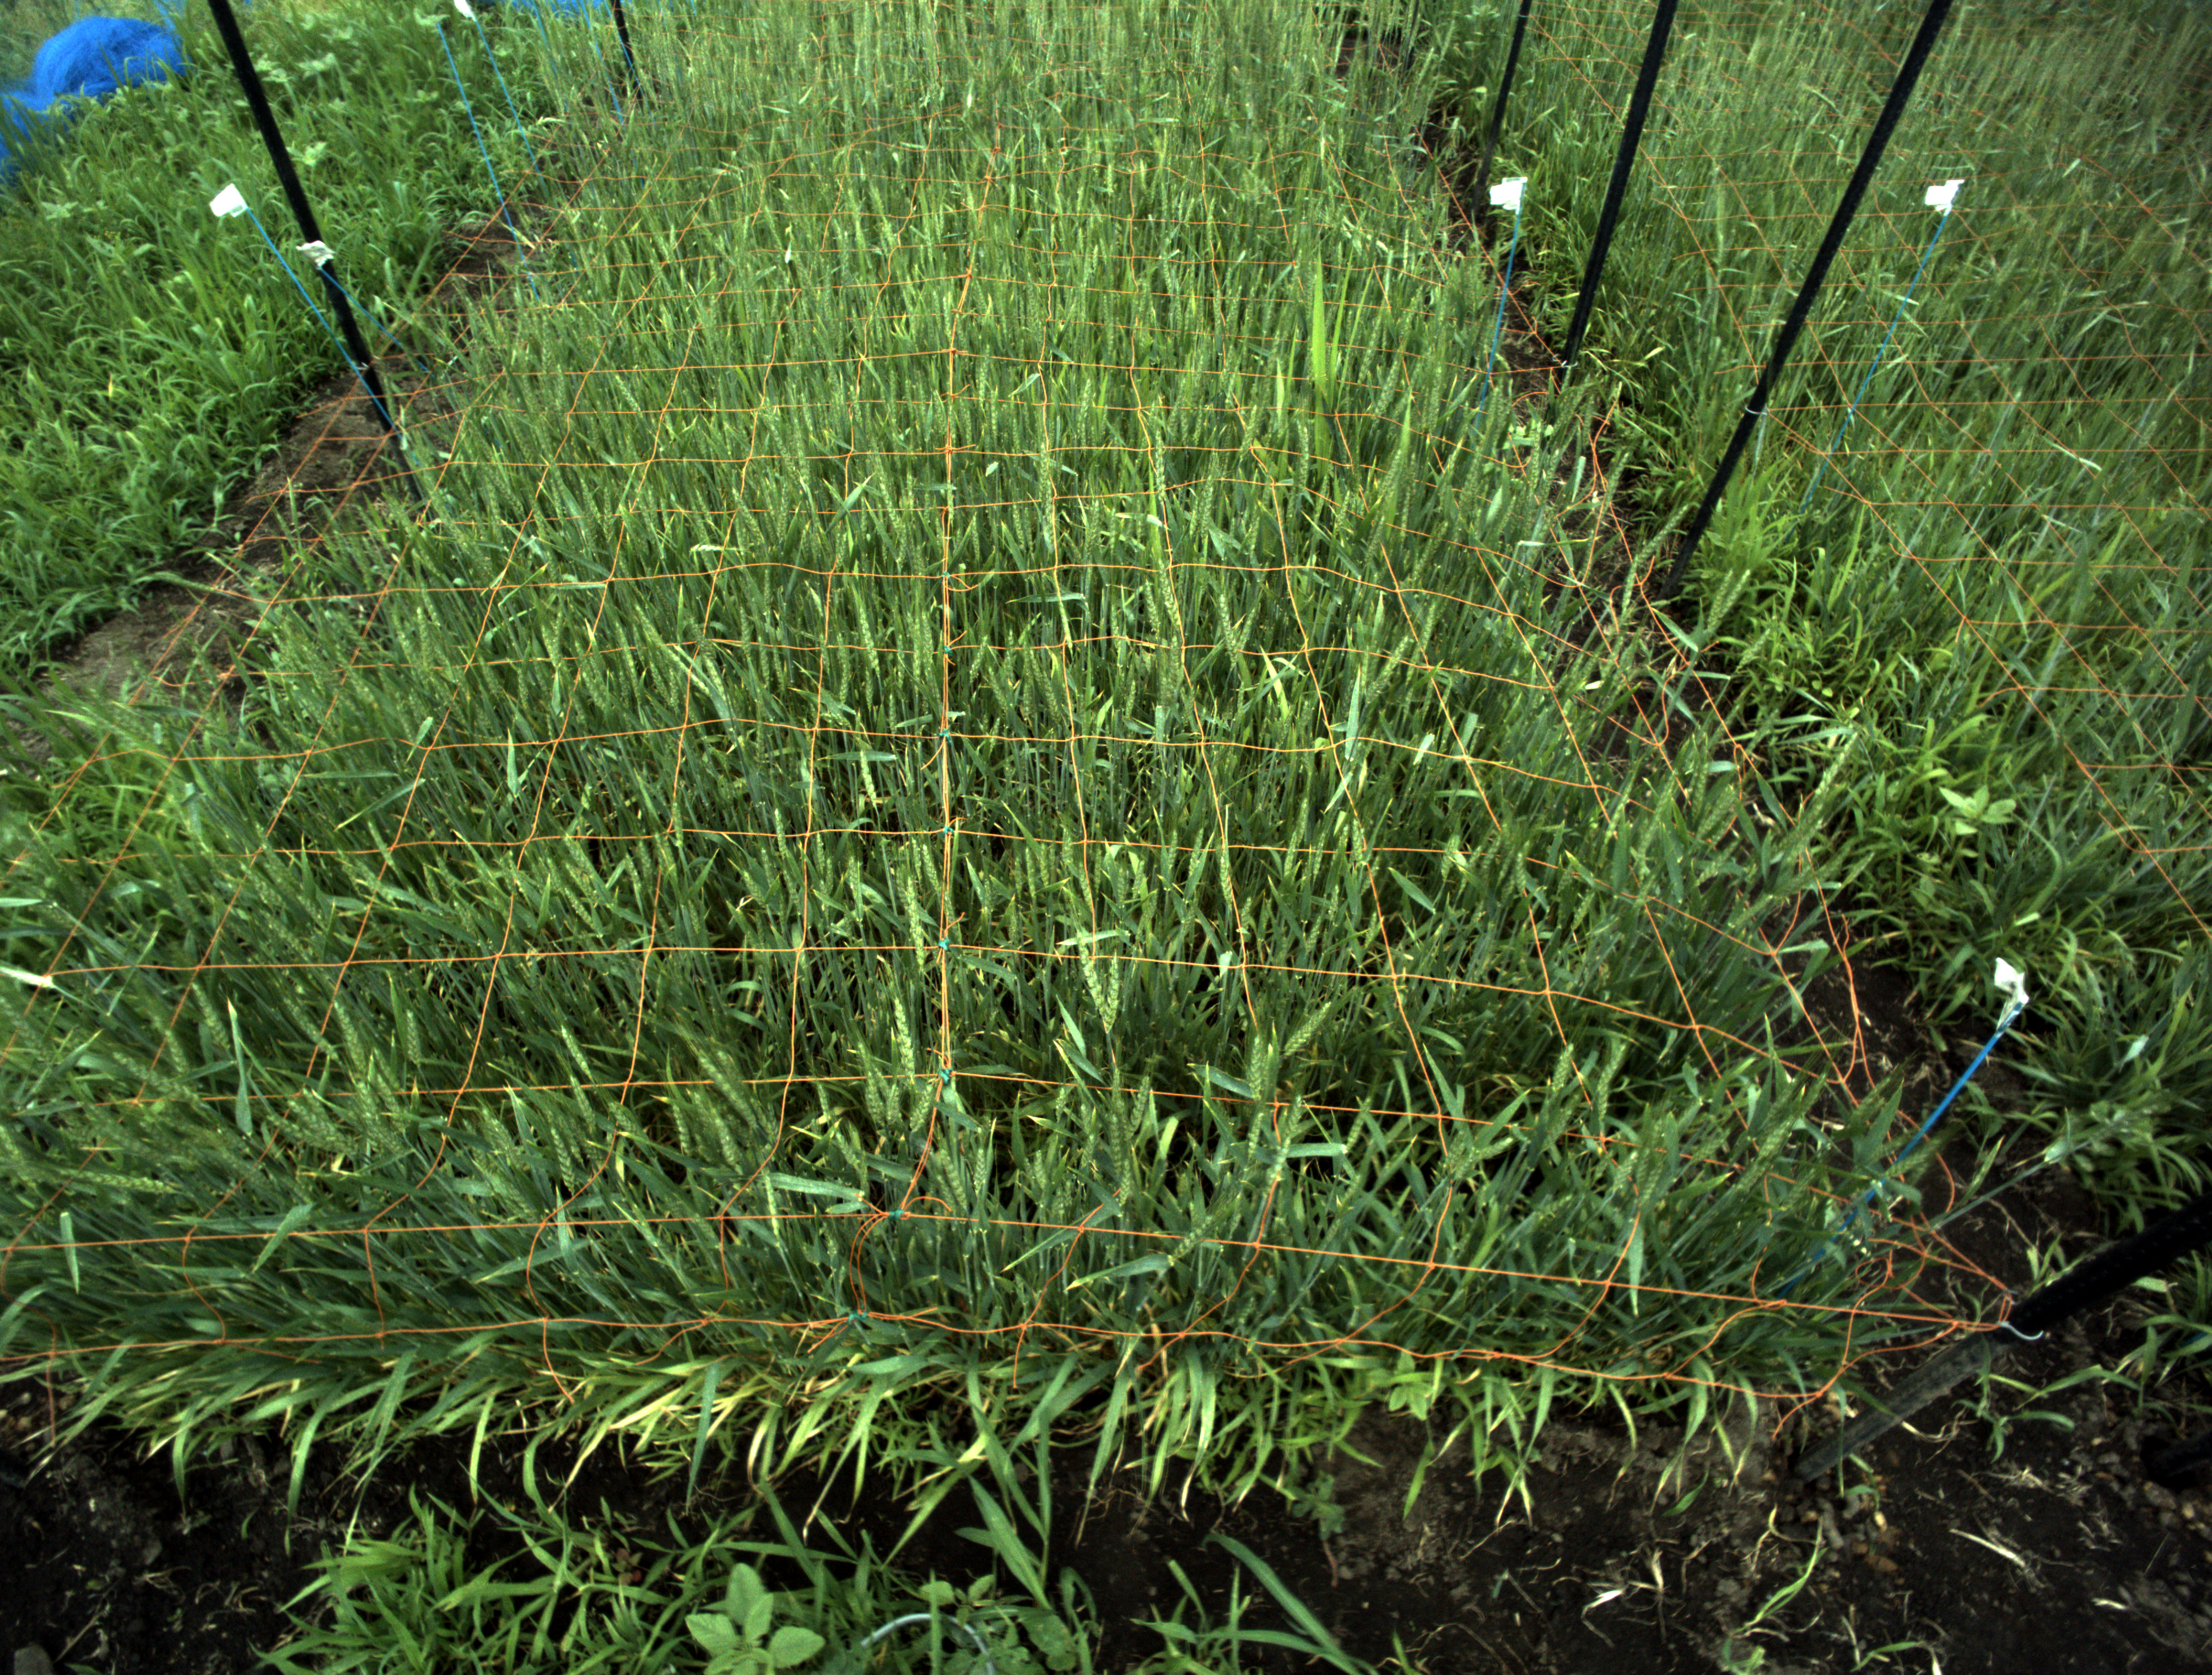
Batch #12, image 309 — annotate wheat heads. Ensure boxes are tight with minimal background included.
[811,522,821,565]
[836,1132,860,1169]
[1778,1167,1816,1205]
[1196,294,1205,333]
[783,869,801,912]
[1288,247,1302,295]
[1853,1076,1889,1116]
[748,1097,775,1142]
[711,1107,746,1165]
[859,366,868,402]
[1469,729,1480,755]
[906,292,918,331]
[706,258,719,283]
[1115,18,1123,50]
[1522,506,1535,552]
[601,115,623,159]
[568,685,588,723]
[1487,387,1501,428]
[1376,565,1389,586]
[1280,1093,1302,1147]
[979,345,991,401]
[974,277,988,311]
[536,856,559,895]
[1125,511,1136,549]
[561,836,595,875]
[1221,422,1233,464]
[818,478,830,506]
[1319,136,1325,164]
[1459,845,1483,890]
[1023,641,1035,688]
[801,3,808,19]
[1439,19,1455,60]
[1439,280,1452,327]
[741,429,754,475]
[1241,388,1270,459]
[889,692,898,734]
[1630,874,1655,918]
[1064,1178,1073,1210]
[1433,284,1441,306]
[758,635,770,686]
[889,11,897,38]
[1097,236,1108,266]
[1343,385,1350,433]
[633,623,646,662]
[580,478,603,524]
[393,614,414,655]
[532,656,550,695]
[1464,399,1470,417]
[1061,75,1070,97]
[507,937,523,965]
[1055,1182,1063,1216]
[927,56,935,85]
[922,217,933,263]
[632,345,643,365]
[1299,167,1310,197]
[1636,1159,1667,1205]
[867,342,873,364]
[931,390,949,436]
[1386,12,1395,36]
[904,67,910,82]
[1735,627,1770,672]
[1335,488,1351,535]
[1287,487,1298,525]
[641,33,647,57]
[1055,294,1061,326]
[662,837,679,884]
[1556,653,1583,698]
[1094,847,1103,892]
[480,459,525,514]
[988,665,1009,712]
[921,611,933,665]
[1161,250,1173,296]
[474,703,498,736]
[416,605,434,671]
[1814,731,1857,798]
[1365,649,1380,686]
[624,852,642,890]
[863,0,872,39]
[799,1243,817,1266]
[1423,759,1444,791]
[1191,24,1198,57]
[725,1113,751,1145]
[1212,743,1225,767]
[546,857,567,895]
[1283,277,1290,298]
[1284,830,1298,877]
[1570,653,1598,687]
[1682,1095,1704,1120]
[332,684,363,718]
[59,1113,97,1149]
[701,653,732,709]
[1061,828,1073,868]
[858,1165,870,1201]
[672,802,684,848]
[1225,267,1232,316]
[1080,281,1088,323]
[703,0,713,22]
[1923,264,1936,287]
[401,519,443,576]
[428,488,479,557]
[708,199,720,222]
[1117,1159,1131,1207]
[857,1040,873,1070]
[333,530,351,570]
[635,488,651,532]
[1023,1157,1036,1187]
[1167,125,1176,168]
[654,51,661,78]
[1347,49,1361,86]
[1003,629,1014,677]
[1213,290,1223,336]
[700,550,719,584]
[948,401,956,444]
[1566,372,1590,420]
[637,605,668,652]
[1611,1150,1639,1193]
[483,1108,500,1152]
[1350,443,1362,496]
[1167,380,1186,432]
[1638,815,1647,884]
[1005,229,1015,264]
[650,348,665,376]
[1081,16,1090,61]
[1566,707,1589,747]
[433,645,451,673]
[773,806,788,858]
[721,560,727,594]
[649,258,660,279]
[786,422,798,466]
[1206,1,1218,18]
[1636,1147,1652,1187]
[1155,13,1161,33]
[1192,101,1200,124]
[864,151,875,182]
[1260,1054,1270,1081]
[1715,122,1730,162]
[765,1101,780,1138]
[837,321,845,358]
[956,529,962,549]
[785,304,797,336]
[764,493,776,520]
[265,863,300,900]
[575,638,594,677]
[755,910,765,943]
[971,162,979,187]
[1117,865,1125,906]
[1602,636,1625,676]
[970,635,989,683]
[906,471,914,497]
[1422,679,1433,720]
[972,1147,987,1192]
[830,16,842,58]
[909,835,923,878]
[824,262,835,335]
[1092,244,1099,271]
[820,633,830,673]
[909,1084,935,1133]
[733,54,739,83]
[969,321,979,350]
[691,1208,720,1243]
[1294,28,1306,87]
[689,368,701,397]
[1708,569,1734,624]
[1438,481,1448,513]
[1557,575,1573,617]
[899,92,903,110]
[507,413,532,460]
[1291,224,1299,249]
[797,618,802,642]
[854,221,864,245]
[91,687,154,742]
[859,607,882,675]
[752,19,760,46]
[56,1125,99,1142]
[632,300,638,321]
[658,266,674,299]
[1376,12,1384,48]
[906,877,924,968]
[218,1148,272,1191]
[777,892,788,931]
[1598,452,1630,518]
[831,711,852,728]
[1580,393,1596,447]
[1307,336,1316,384]
[1241,172,1252,218]
[417,665,430,689]
[533,423,547,454]
[657,913,679,945]
[827,103,832,127]
[503,1179,537,1218]
[1301,746,1310,770]
[835,524,841,554]
[876,30,882,57]
[1154,429,1167,504]
[819,877,830,918]
[517,666,531,709]
[1123,1075,1151,1141]
[853,10,862,46]
[570,137,583,173]
[685,144,696,168]
[671,1101,693,1155]
[1177,664,1186,690]
[555,198,574,223]
[865,1087,877,1122]
[1426,365,1444,431]
[737,76,747,94]
[1420,387,1430,431]
[310,700,339,738]
[381,375,396,419]
[592,317,602,349]
[1085,554,1093,585]
[1994,259,2018,289]
[656,583,675,621]
[1161,181,1167,216]
[967,231,974,256]
[286,1101,365,1157]
[933,213,941,240]
[1146,889,1159,922]
[133,660,173,706]
[1427,520,1448,563]
[772,479,781,509]
[2135,419,2158,451]
[1323,204,1329,228]
[933,52,939,80]
[601,250,612,286]
[700,43,705,63]
[668,668,679,706]
[1125,214,1131,235]
[620,240,634,268]
[1529,421,1541,491]
[1500,839,1531,901]
[1260,1137,1291,1198]
[1137,283,1147,321]
[1402,7,1410,41]
[1603,781,1632,844]
[965,410,973,447]
[1327,185,1336,221]
[1294,418,1304,443]
[653,829,668,876]
[770,288,779,319]
[1382,322,1389,350]
[546,703,556,739]
[1080,1102,1092,1133]
[1289,530,1294,551]
[911,11,916,42]
[642,96,649,113]
[860,496,869,537]
[1063,9,1070,40]
[1131,860,1146,900]
[529,425,537,447]
[612,20,621,47]
[825,857,834,895]
[1707,809,1736,852]
[1323,927,1329,955]
[422,865,442,901]
[480,354,494,384]
[1051,1196,1060,1218]
[19,837,43,860]
[1222,701,1235,721]
[1046,22,1057,63]
[872,1063,905,1124]
[1408,14,1421,50]
[771,439,780,474]
[745,47,750,73]
[643,164,661,199]
[1769,804,1824,857]
[663,313,674,351]
[422,588,442,629]
[716,32,725,56]
[1532,683,1545,709]
[1235,218,1242,238]
[672,82,687,123]
[1410,251,1416,273]
[2089,1112,2138,1141]
[1104,724,1114,757]
[1041,142,1048,170]
[635,531,650,555]
[893,998,916,1091]
[556,362,567,415]
[1330,824,1348,868]
[1124,664,1134,697]
[1457,349,1470,381]
[639,840,654,893]
[876,312,883,348]
[1456,1151,1475,1178]
[1312,831,1325,876]
[157,1111,226,1149]
[1451,1142,1465,1167]
[1922,75,1942,113]
[1225,354,1243,409]
[1442,1130,1466,1172]
[453,899,476,934]
[1069,287,1076,309]
[1167,827,1179,870]
[2166,234,2188,269]
[1342,664,1360,718]
[855,277,865,295]
[1365,635,1409,706]
[1402,228,1410,267]
[1034,68,1040,93]
[1377,449,1402,497]
[1915,71,1932,105]
[831,49,837,71]
[1078,694,1086,739]
[690,35,699,51]
[1013,504,1026,548]
[867,1069,886,1120]
[193,981,231,1050]
[1193,354,1206,387]
[1012,415,1020,449]
[1308,188,1315,221]
[848,187,861,220]
[1091,425,1097,452]
[272,631,298,671]
[275,512,299,550]
[1219,345,1235,394]
[1440,836,1461,879]
[820,1221,840,1256]
[1119,672,1126,711]
[664,43,675,80]
[896,866,906,906]
[664,742,677,775]
[1187,828,1203,877]
[691,600,699,622]
[1400,454,1407,486]
[653,30,660,51]
[851,307,865,342]
[1582,529,1596,581]
[514,291,524,320]
[659,2,678,44]
[734,512,752,549]
[58,864,103,910]
[362,534,389,575]
[1090,12,1096,40]
[1349,828,1367,865]
[866,314,875,333]
[893,596,899,620]
[955,313,970,360]
[405,885,432,916]
[1122,30,1128,51]
[1549,391,1572,441]
[1157,557,1181,632]
[264,1114,339,1155]
[1130,743,1139,768]
[1275,710,1293,749]
[923,493,932,524]
[1907,73,1924,109]
[1493,409,1511,443]
[1223,734,1235,775]
[478,657,497,695]
[742,280,751,320]
[778,481,790,539]
[938,86,946,101]
[780,1,788,20]
[623,712,637,746]
[1383,464,1401,504]
[663,1192,686,1222]
[970,514,981,560]
[552,59,571,86]
[942,295,953,340]
[923,651,942,704]
[1171,184,1175,217]
[983,433,991,457]
[1367,511,1377,549]
[724,421,732,452]
[1358,318,1385,387]
[1030,649,1045,692]
[913,614,922,692]
[1337,241,1343,270]
[985,887,999,912]
[859,749,878,806]
[761,847,778,889]
[1743,1164,1765,1189]
[1179,255,1185,283]
[507,1145,527,1170]
[1592,1150,1613,1184]
[1084,499,1102,557]
[897,633,907,689]
[834,395,841,421]
[1771,18,1785,58]
[906,273,917,299]
[803,530,810,557]
[349,535,372,575]
[568,1075,597,1132]
[1183,298,1192,340]
[627,435,642,471]
[1009,183,1016,217]
[618,669,632,708]
[1604,670,1640,711]
[840,662,850,703]
[1106,316,1115,358]
[1219,854,1234,910]
[801,56,811,87]
[615,620,641,700]
[1172,1214,1215,1261]
[549,454,564,491]
[1550,1042,1574,1093]
[1049,221,1056,249]
[1129,299,1139,335]
[1101,951,1121,1033]
[1474,1138,1516,1163]
[802,320,813,355]
[692,1093,719,1140]
[853,48,861,76]
[660,235,679,266]
[584,528,598,559]
[1149,403,1158,428]
[1536,1194,1572,1220]
[717,1050,747,1096]
[717,234,728,269]
[919,0,929,33]
[832,398,840,433]
[1254,267,1264,291]
[714,749,728,766]
[655,649,671,681]
[989,717,999,753]
[1361,644,1371,690]
[1176,78,1183,113]
[558,1117,584,1163]
[692,505,707,542]
[1261,208,1272,238]
[693,427,701,449]
[1262,484,1271,509]
[1481,834,1501,868]
[704,328,716,358]
[954,1,968,34]
[596,400,619,453]
[356,1081,385,1155]
[1286,35,1294,61]
[1341,434,1348,466]
[1686,760,1699,795]
[1699,63,1713,86]
[776,6,788,49]
[794,251,817,303]
[1548,673,1567,696]
[1190,499,1200,536]
[1159,127,1168,166]
[870,574,880,610]
[1207,15,1212,52]
[1786,818,1823,864]
[817,1083,830,1119]
[658,497,673,536]
[1126,680,1137,718]
[890,368,897,427]
[1194,474,1214,537]
[1449,439,1463,471]
[584,497,596,539]
[1450,509,1463,554]
[1276,692,1283,713]
[539,61,564,115]
[754,719,765,770]
[0,1125,38,1193]
[1742,709,1778,761]
[1235,195,1243,219]
[1080,1134,1096,1171]
[944,889,963,948]
[1242,345,1249,377]
[549,1128,576,1193]
[303,645,339,681]
[337,610,373,658]
[761,1165,781,1237]
[1306,916,1322,952]
[192,672,219,723]
[665,414,675,442]
[1413,47,1434,105]
[1597,1079,1608,1120]
[1201,486,1214,543]
[1085,134,1092,154]
[550,479,565,523]
[810,701,822,736]
[1526,512,1554,574]
[743,870,768,909]
[337,653,380,705]
[456,665,468,684]
[569,1119,606,1163]
[1175,295,1182,341]
[809,162,820,175]
[488,513,504,543]
[599,29,616,75]
[1364,728,1376,759]
[946,479,956,522]
[831,149,845,173]
[835,533,848,572]
[255,821,302,890]
[855,90,867,137]
[774,265,790,297]
[1105,53,1116,93]
[648,221,674,264]
[508,857,528,895]
[838,1265,846,1283]
[791,100,804,138]
[1245,286,1255,330]
[732,487,764,542]
[602,485,613,543]
[998,8,1007,65]
[896,268,905,291]
[822,405,828,430]
[1021,683,1033,720]
[1360,855,1380,895]
[619,551,639,591]
[1712,569,1749,630]
[1863,256,1879,295]
[718,80,728,112]
[712,80,717,103]
[785,121,794,151]
[1345,1095,1371,1151]
[301,1088,330,1122]
[1023,401,1031,433]
[1227,1213,1241,1234]
[1194,395,1205,445]
[1323,1219,1340,1246]
[1057,437,1067,481]
[573,328,595,368]
[733,698,745,726]
[1819,845,1851,880]
[974,58,981,77]
[1297,427,1310,493]
[1404,0,1416,39]
[1018,338,1026,371]
[1290,664,1299,698]
[519,209,533,230]
[1280,933,1288,957]
[1107,507,1117,555]
[940,58,946,85]
[82,707,144,756]
[358,505,383,541]
[1141,185,1153,212]
[1438,678,1451,714]
[764,446,774,476]
[754,81,765,119]
[959,353,966,375]
[711,295,724,356]
[1689,762,1709,827]
[904,376,915,421]
[0,1165,64,1187]
[578,16,596,73]
[683,4,692,30]
[1848,108,1864,130]
[1019,296,1026,326]
[1048,421,1056,454]
[1383,87,1391,128]
[938,203,946,233]
[798,276,811,314]
[1364,515,1385,563]
[1115,1096,1127,1133]
[982,713,989,738]
[1250,153,1261,171]
[1020,749,1027,775]
[1246,1113,1264,1160]
[1303,40,1309,56]
[797,312,803,345]
[1218,592,1239,663]
[1201,571,1209,595]
[1135,912,1146,941]
[476,346,486,380]
[1249,504,1257,543]
[1076,187,1084,218]
[907,611,915,640]
[797,21,811,59]
[1882,1137,1940,1176]
[667,32,675,63]
[1404,286,1422,331]
[1352,816,1363,862]
[1265,290,1276,325]
[1005,299,1015,335]
[1014,856,1025,899]
[1237,682,1244,720]
[494,898,515,926]
[1403,687,1413,715]
[1275,1189,1284,1217]
[743,5,748,28]
[1228,578,1238,599]
[1563,419,1580,446]
[1633,767,1680,865]
[879,230,890,259]
[1375,0,1382,14]
[1263,898,1272,927]
[1005,651,1015,683]
[1072,247,1079,270]
[884,1084,902,1124]
[684,694,704,735]
[1403,772,1417,796]
[279,1176,317,1205]
[1956,69,1975,105]
[813,0,819,15]
[1074,327,1083,349]
[1225,285,1242,331]
[1176,1172,1191,1200]
[548,388,566,420]
[1135,435,1150,466]
[802,717,814,752]
[1106,163,1113,196]
[1713,86,1725,125]
[156,870,196,916]
[499,856,520,898]
[739,575,761,619]
[158,575,216,593]
[1059,601,1074,650]
[860,551,870,580]
[1035,18,1041,41]
[404,1008,424,1066]
[1086,412,1093,447]
[1221,451,1230,483]
[1150,168,1160,201]
[749,0,759,14]
[764,568,772,611]
[166,1030,198,1092]
[1257,562,1268,586]
[754,286,766,328]
[932,289,942,328]
[802,391,813,430]
[817,400,824,437]
[713,241,737,268]
[1458,439,1485,507]
[1249,516,1260,552]
[1088,209,1097,230]
[136,1119,181,1155]
[1269,19,1278,54]
[1469,897,1484,930]
[1206,197,1216,243]
[1200,64,1205,82]
[1144,280,1154,325]
[1073,928,1108,1016]
[1258,717,1268,746]
[1110,1065,1121,1107]
[1082,246,1091,280]
[435,678,469,728]
[283,997,341,1066]
[700,433,706,456]
[868,300,875,313]
[614,374,644,419]
[1327,884,1340,918]
[1098,404,1109,441]
[924,681,930,713]
[764,511,778,547]
[655,11,666,48]
[790,416,811,483]
[1646,1119,1663,1150]
[765,396,775,424]
[85,1114,174,1162]
[1541,1112,1572,1153]
[731,84,752,124]
[1063,533,1085,571]
[774,649,785,688]
[460,455,473,486]
[649,661,671,702]
[1033,1148,1049,1190]
[668,223,676,267]
[1756,1115,1792,1159]
[919,78,925,101]
[881,216,895,243]
[436,856,457,889]
[491,1118,516,1149]
[1111,603,1121,652]
[748,425,762,455]
[1112,435,1118,469]
[894,81,899,106]
[1077,860,1093,912]
[1013,306,1020,341]
[553,608,564,653]
[863,47,870,66]
[864,401,872,442]
[711,28,719,59]
[909,497,914,515]
[922,843,942,895]
[811,327,826,367]
[1595,1044,1626,1097]
[974,292,982,321]
[810,1116,821,1145]
[1008,913,1022,948]
[1433,596,1449,626]
[565,860,598,901]
[1404,452,1418,506]
[406,618,423,657]
[814,744,824,780]
[1022,506,1034,551]
[1069,308,1081,342]
[897,523,908,566]
[465,416,497,464]
[1732,894,1773,925]
[979,1113,993,1143]
[917,389,927,424]
[581,930,598,958]
[1045,477,1057,544]
[112,1049,201,1106]
[1058,220,1066,247]
[646,56,652,71]
[1332,31,1343,69]
[1372,358,1403,426]
[1080,423,1087,457]
[746,259,756,288]
[483,295,508,342]
[1140,1,1147,31]
[1554,863,1572,899]
[1182,899,1197,934]
[742,216,750,245]
[1317,474,1329,514]
[958,395,967,427]
[1103,292,1110,331]
[1239,403,1256,450]
[597,71,606,102]
[484,473,499,522]
[1070,35,1076,59]
[1076,226,1086,251]
[1025,845,1036,897]
[408,693,424,726]
[1295,797,1307,847]
[814,402,823,440]
[1179,409,1189,447]
[593,179,615,223]
[696,76,704,116]
[1277,33,1287,63]
[1185,197,1196,223]
[1558,894,1568,924]
[1051,142,1063,183]
[1252,175,1261,211]
[1188,256,1196,295]
[1705,704,1739,752]
[1189,1202,1202,1228]
[1247,1034,1265,1100]
[619,440,629,465]
[486,666,504,698]
[356,858,394,903]
[1205,53,1221,98]
[637,68,657,103]
[295,895,331,925]
[1399,310,1408,340]
[1516,850,1526,894]
[471,540,494,576]
[666,734,682,757]
[1283,1001,1330,1058]
[817,832,825,876]
[1135,498,1143,542]
[564,151,577,177]
[905,11,912,47]
[828,167,838,202]
[564,887,596,929]
[926,27,934,45]
[1404,642,1420,686]
[1055,1087,1068,1125]
[882,541,888,565]
[852,950,865,984]
[647,488,659,528]
[748,930,760,955]
[94,1104,126,1134]
[1139,320,1151,348]
[1387,362,1422,438]
[745,76,753,100]
[1325,345,1332,378]
[1399,485,1411,539]
[680,58,692,98]
[402,715,418,740]
[1141,740,1148,760]
[868,186,886,213]
[367,820,397,872]
[1554,1094,1580,1127]
[1410,537,1433,582]
[591,655,608,694]
[1230,606,1257,669]
[895,170,907,192]
[1364,911,1377,950]
[696,488,716,530]
[336,851,362,892]
[687,615,718,660]
[1693,839,1738,886]
[579,246,594,279]
[1276,115,1286,148]
[1420,600,1435,651]
[1043,671,1061,724]
[975,359,980,391]
[916,544,926,582]
[936,515,944,551]
[372,1047,404,1091]
[1497,383,1506,420]
[764,204,784,253]
[1734,73,1750,115]
[1122,870,1129,902]
[1796,1073,1826,1118]
[524,314,541,345]
[1193,22,1203,64]
[1119,469,1126,492]
[1108,1110,1123,1176]
[1202,94,1210,125]
[740,605,754,661]
[720,1132,737,1165]
[993,281,1005,327]
[1700,790,1738,835]
[1367,638,1377,669]
[667,649,711,696]
[983,878,992,908]
[376,1073,406,1129]
[465,297,502,353]
[1027,270,1046,331]
[1689,1129,1730,1164]
[1312,58,1322,79]
[1099,6,1111,75]
[935,1174,960,1214]
[885,295,890,313]
[472,510,488,533]
[582,671,607,710]
[1277,505,1286,535]
[1123,736,1134,760]
[1108,274,1115,293]
[753,216,782,230]
[287,640,306,673]
[269,730,296,767]
[541,315,553,375]
[1537,449,1559,507]
[1312,195,1322,223]
[1500,841,1511,873]
[1012,447,1019,469]
[1622,552,1640,615]
[699,1057,758,1132]
[1468,258,1481,316]
[892,430,902,470]
[1195,707,1207,735]
[471,552,488,585]
[638,135,653,167]
[1178,161,1193,221]
[1340,1173,1362,1205]
[218,1124,250,1153]
[1509,486,1528,534]
[412,687,429,716]
[844,903,853,939]
[564,443,571,463]
[1328,222,1340,255]
[0,997,52,1065]
[521,374,543,417]
[540,626,570,673]
[1410,383,1425,425]
[1771,865,1812,905]
[1620,91,1632,118]
[460,1119,489,1171]
[562,1023,595,1084]
[1168,635,1181,707]
[153,1015,167,1037]
[1571,892,1595,929]
[1498,495,1517,532]
[579,314,588,347]
[1076,408,1082,438]
[1337,127,1344,156]
[871,436,885,480]
[1367,0,1374,32]
[938,1146,969,1209]
[475,864,499,897]
[769,35,776,70]
[178,860,204,897]
[1173,153,1180,179]
[565,209,582,216]
[1241,1297,1254,1319]
[27,906,86,938]
[759,414,800,484]
[1001,462,1008,486]
[1144,576,1162,635]
[1040,2,1046,32]
[1158,670,1169,714]
[1870,1142,1904,1159]
[540,415,553,448]
[848,854,859,893]
[1304,260,1315,320]
[2079,226,2089,250]
[787,16,794,55]
[735,244,746,277]
[58,1170,175,1195]
[1298,697,1316,732]
[919,242,927,269]
[193,644,221,690]
[1393,197,1399,224]
[1277,395,1292,438]
[840,231,851,289]
[1440,715,1456,743]
[1055,191,1064,216]
[576,44,587,70]
[589,415,601,456]
[1697,100,1716,127]
[1217,67,1226,104]
[907,525,919,576]
[749,332,755,356]
[241,862,290,908]
[1247,220,1254,243]
[990,388,998,437]
[1697,801,1711,836]
[1065,209,1074,233]
[1473,508,1482,532]
[1714,229,1724,259]
[1039,841,1050,886]
[1322,25,1333,44]
[1638,505,1687,566]
[1763,1086,1794,1123]
[1843,850,1874,885]
[546,550,560,593]
[851,385,863,429]
[531,861,546,895]
[814,66,820,90]
[739,443,747,459]
[604,1100,643,1139]
[1725,228,1737,252]
[1358,2,1367,32]
[762,27,772,46]
[704,39,711,58]
[1047,843,1057,876]
[688,899,702,937]
[528,493,547,533]
[1497,849,1517,881]
[1279,302,1300,324]
[836,631,850,666]
[310,647,327,695]
[1345,310,1354,373]
[259,909,307,956]
[1039,441,1049,507]
[1263,330,1280,390]
[377,661,389,683]
[358,1111,405,1155]
[1241,896,1252,930]
[828,361,845,405]
[333,1001,368,1073]
[1611,643,1633,686]
[865,666,874,712]
[1077,379,1091,436]
[1182,686,1195,726]
[934,1,939,12]
[788,747,799,783]
[879,482,903,535]
[1393,0,1400,28]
